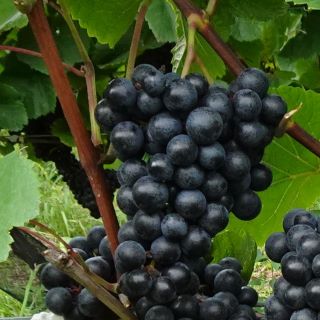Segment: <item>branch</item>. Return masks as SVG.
Masks as SVG:
<instances>
[{
  "label": "branch",
  "instance_id": "30e6481e",
  "mask_svg": "<svg viewBox=\"0 0 320 320\" xmlns=\"http://www.w3.org/2000/svg\"><path fill=\"white\" fill-rule=\"evenodd\" d=\"M31 27L48 65L67 125L79 150V161L84 167L94 193L112 256L119 246L120 229L98 153L89 135L81 111L65 74L44 10L43 0H34L28 13Z\"/></svg>",
  "mask_w": 320,
  "mask_h": 320
},
{
  "label": "branch",
  "instance_id": "325d2c04",
  "mask_svg": "<svg viewBox=\"0 0 320 320\" xmlns=\"http://www.w3.org/2000/svg\"><path fill=\"white\" fill-rule=\"evenodd\" d=\"M173 2L182 13L184 21L187 22V19H190L197 23L196 31L208 41L225 64L229 66L230 71L238 78L241 71L247 69V67L242 60L235 56L228 45L215 34L214 27L209 24L210 17L216 14L217 0H210L206 10L195 8L190 0H173Z\"/></svg>",
  "mask_w": 320,
  "mask_h": 320
},
{
  "label": "branch",
  "instance_id": "170604dd",
  "mask_svg": "<svg viewBox=\"0 0 320 320\" xmlns=\"http://www.w3.org/2000/svg\"><path fill=\"white\" fill-rule=\"evenodd\" d=\"M285 132L320 158V142L300 128L292 117L286 122Z\"/></svg>",
  "mask_w": 320,
  "mask_h": 320
}]
</instances>
